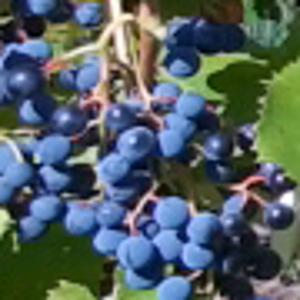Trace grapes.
<instances>
[{
	"label": "grapes",
	"instance_id": "obj_1",
	"mask_svg": "<svg viewBox=\"0 0 300 300\" xmlns=\"http://www.w3.org/2000/svg\"><path fill=\"white\" fill-rule=\"evenodd\" d=\"M12 19L0 26V106L15 107L19 124L43 129L32 142L0 143V209L18 221L22 241L34 243L59 225L72 238H91L98 258L115 256L128 288L153 291L159 300H187L193 284L182 274L162 280L160 265L181 272L213 270L221 292L254 300L251 279L267 281L281 269L277 250L245 228L247 199L234 192L214 210L190 212L175 194L155 195L151 156L165 163L202 164L219 184L237 175L232 159L247 151L254 125L235 137L220 132L217 109L195 91L156 81L150 105L114 103L106 112L57 107L46 65L54 57L41 39L48 23L99 33L107 10L99 1L76 7L62 0H15Z\"/></svg>",
	"mask_w": 300,
	"mask_h": 300
},
{
	"label": "grapes",
	"instance_id": "obj_4",
	"mask_svg": "<svg viewBox=\"0 0 300 300\" xmlns=\"http://www.w3.org/2000/svg\"><path fill=\"white\" fill-rule=\"evenodd\" d=\"M259 172L263 183L277 193H290L296 187L294 178L285 175L283 166L270 160L261 162Z\"/></svg>",
	"mask_w": 300,
	"mask_h": 300
},
{
	"label": "grapes",
	"instance_id": "obj_2",
	"mask_svg": "<svg viewBox=\"0 0 300 300\" xmlns=\"http://www.w3.org/2000/svg\"><path fill=\"white\" fill-rule=\"evenodd\" d=\"M164 65L175 78L197 75L201 57L216 53L229 54L240 50L246 34L240 26H216L201 14L175 16L164 28Z\"/></svg>",
	"mask_w": 300,
	"mask_h": 300
},
{
	"label": "grapes",
	"instance_id": "obj_3",
	"mask_svg": "<svg viewBox=\"0 0 300 300\" xmlns=\"http://www.w3.org/2000/svg\"><path fill=\"white\" fill-rule=\"evenodd\" d=\"M102 75V61L96 55H91L76 68L67 67L61 70L58 82L70 94H86L97 87Z\"/></svg>",
	"mask_w": 300,
	"mask_h": 300
},
{
	"label": "grapes",
	"instance_id": "obj_5",
	"mask_svg": "<svg viewBox=\"0 0 300 300\" xmlns=\"http://www.w3.org/2000/svg\"><path fill=\"white\" fill-rule=\"evenodd\" d=\"M263 221L272 230L287 231L294 223V213L289 205L271 201L264 208Z\"/></svg>",
	"mask_w": 300,
	"mask_h": 300
}]
</instances>
